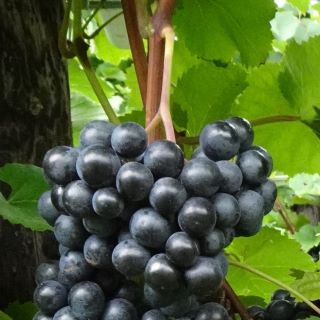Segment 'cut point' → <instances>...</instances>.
Wrapping results in <instances>:
<instances>
[{"label":"cut point","mask_w":320,"mask_h":320,"mask_svg":"<svg viewBox=\"0 0 320 320\" xmlns=\"http://www.w3.org/2000/svg\"><path fill=\"white\" fill-rule=\"evenodd\" d=\"M161 37L165 39V49H164V70H163V82H162V92L161 100L158 111L145 129L146 134H149L154 130L157 125L163 121L166 140L176 144L173 126L170 115V89H171V76H172V63H173V49H174V31L172 28L165 27L161 31Z\"/></svg>","instance_id":"1"}]
</instances>
